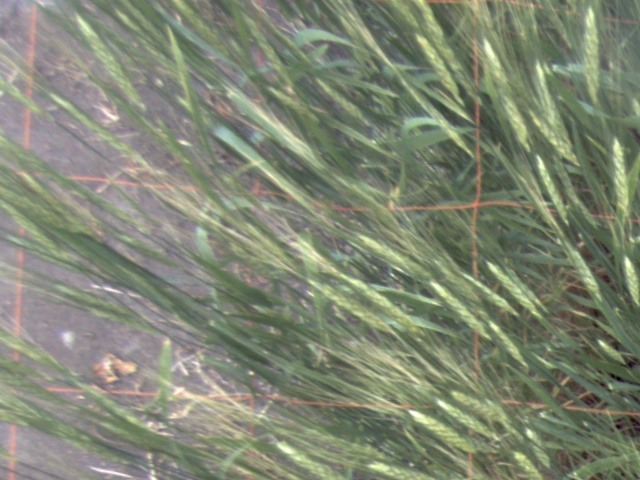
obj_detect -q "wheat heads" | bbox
[70,374,143,428]
[320,80,368,124]
[514,453,542,480]
[462,270,518,322]
[243,17,294,93]
[598,340,628,364]
[73,16,146,110]
[418,2,472,91]
[409,410,470,454]
[46,412,125,464]
[485,39,516,97]
[537,63,573,151]
[562,243,605,310]
[51,96,147,167]
[506,103,530,148]
[632,99,640,118]
[587,8,603,102]
[361,234,429,272]
[341,271,417,327]
[0,202,62,260]
[276,442,346,480]
[416,40,461,102]
[623,256,640,307]
[368,464,440,480]
[530,113,582,172]
[171,30,203,127]
[612,139,630,219]
[311,280,389,333]
[482,309,528,367]
[488,263,539,320]
[438,400,499,444]
[525,428,549,469]
[506,259,549,313]
[430,278,490,341]
[452,390,506,421]
[3,329,43,361]
[535,156,570,224]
